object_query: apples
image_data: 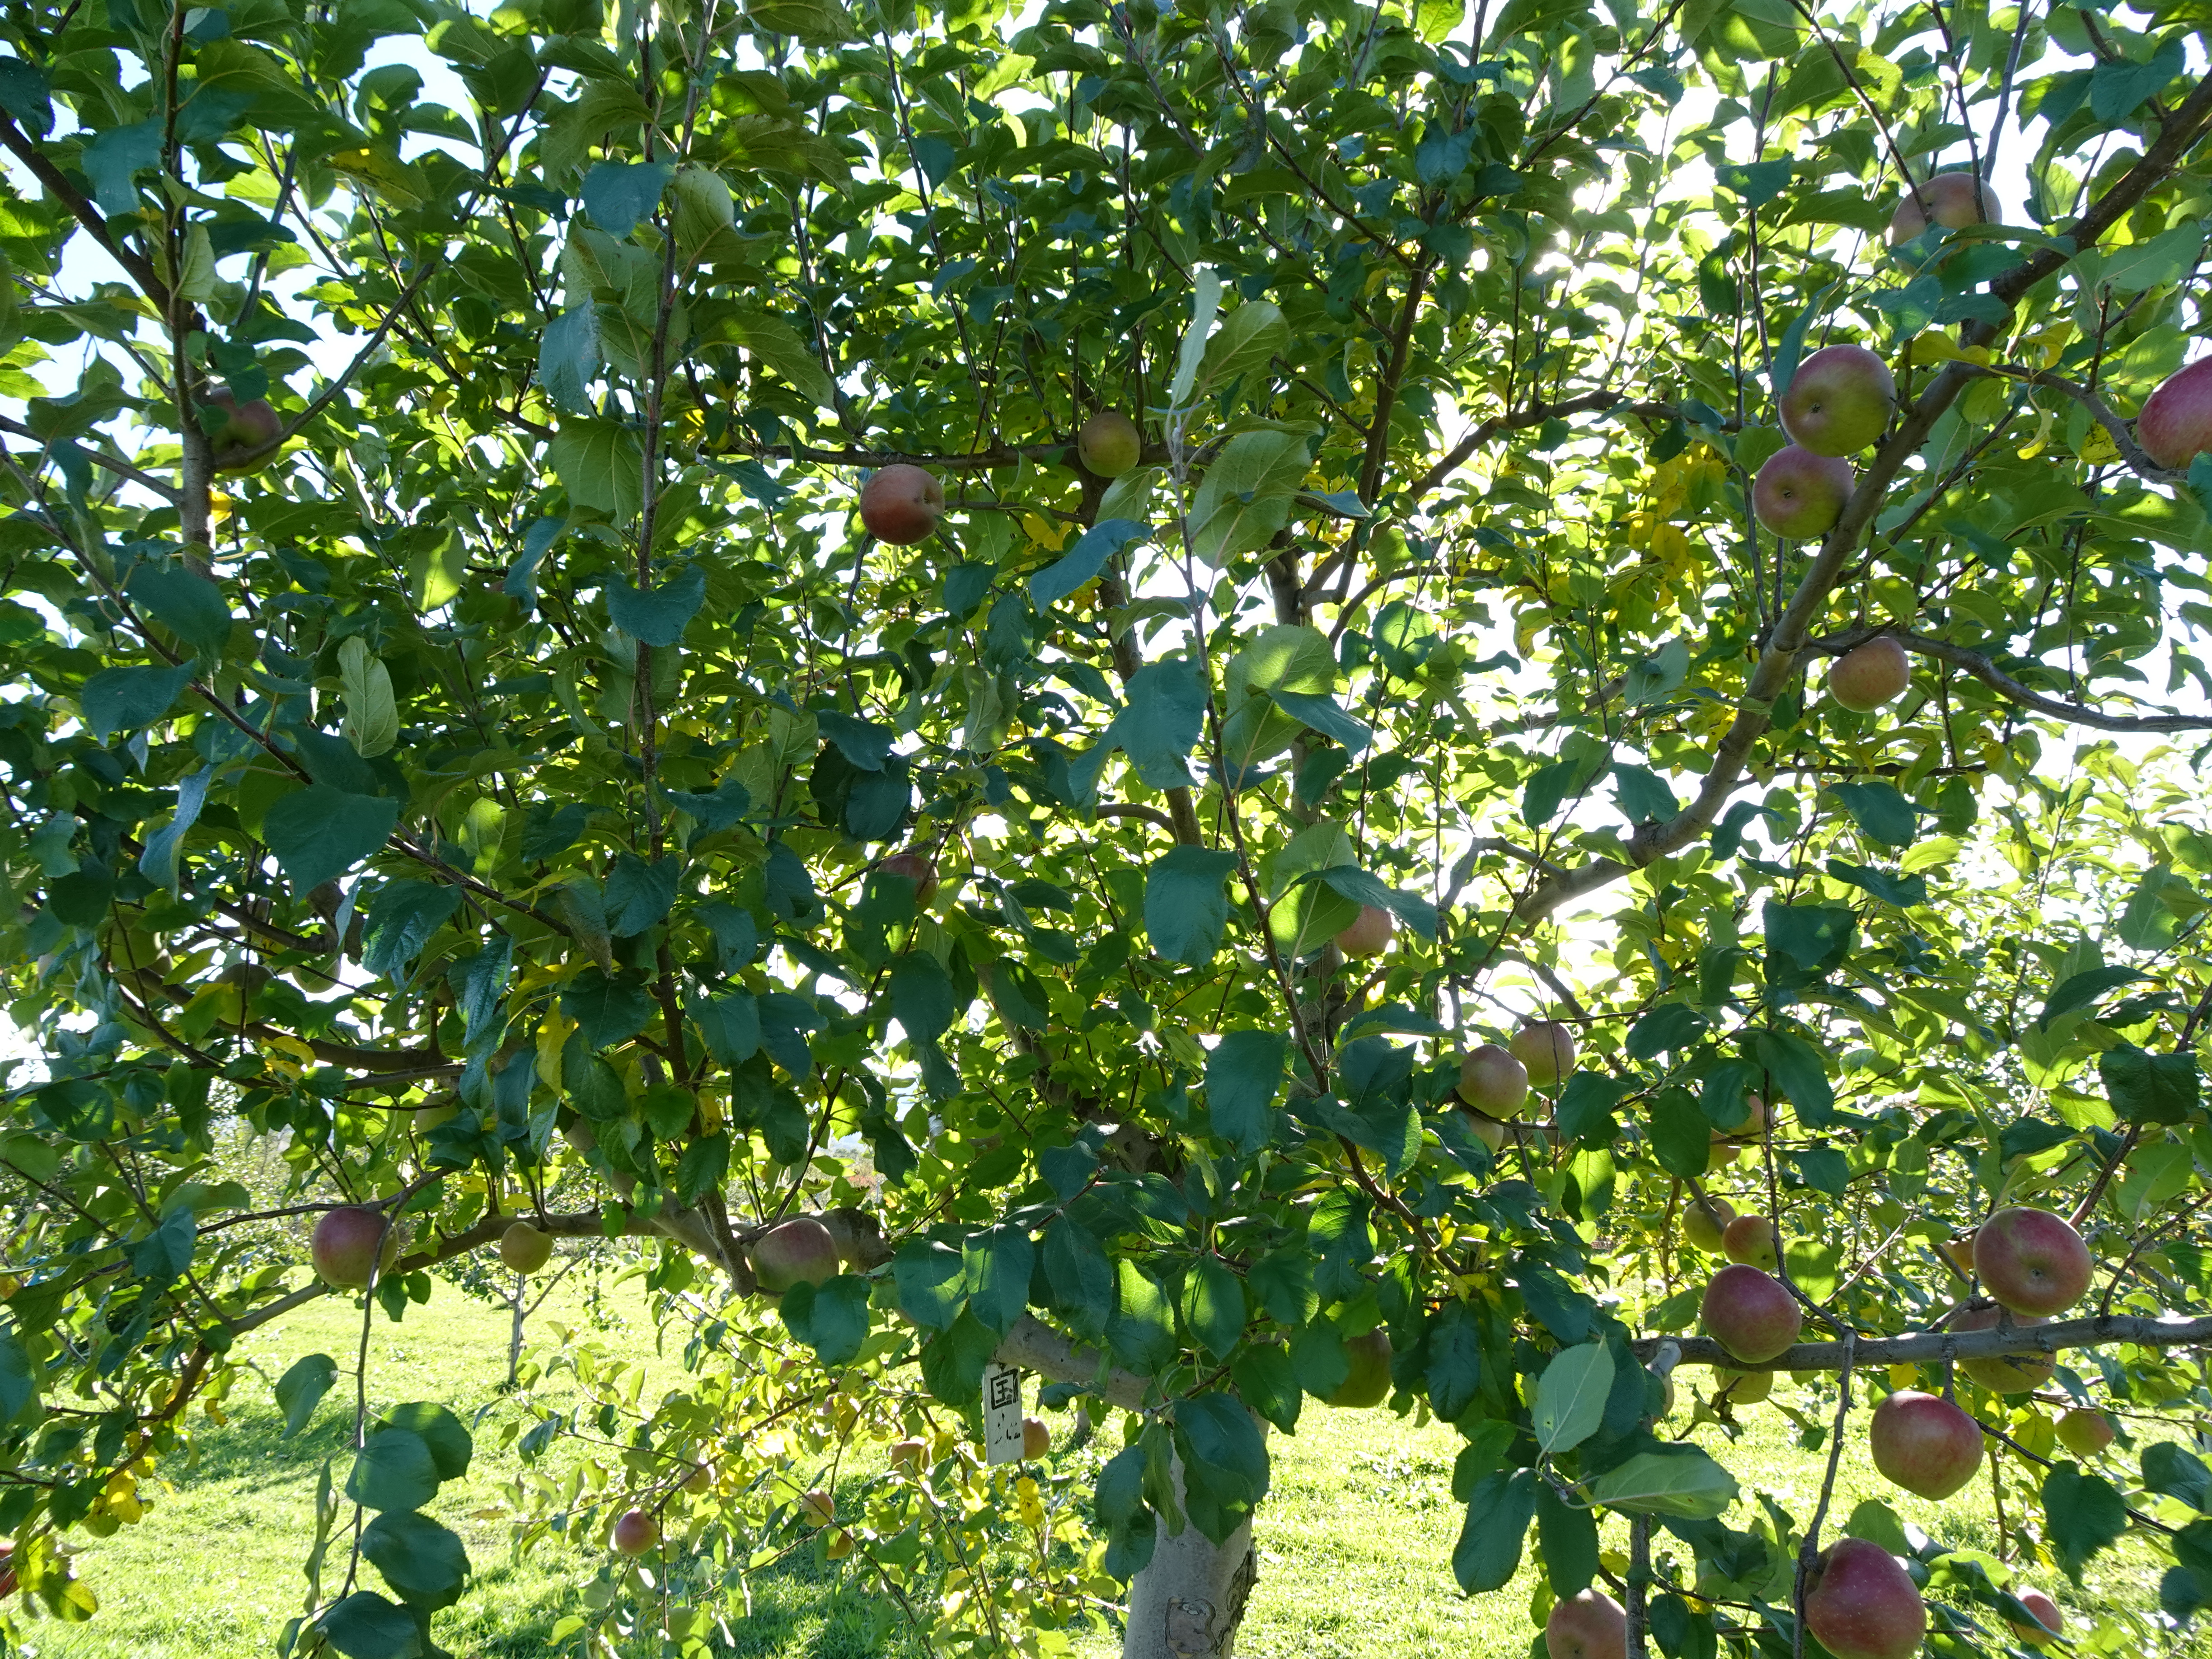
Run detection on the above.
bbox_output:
[822,1392,863,1431]
[554,1095,612,1152]
[239,899,287,949]
[864,1500,884,1518]
[1493,1114,1522,1147]
[817,1376,836,1399]
[312,1202,400,1291]
[1330,894,1393,964]
[198,385,282,481]
[1682,1196,1739,1254]
[0,1548,28,1600]
[1017,833,1041,858]
[0,1268,31,1305]
[1949,1293,2058,1394]
[816,1520,856,1561]
[1941,1228,1978,1276]
[1304,1323,1399,1411]
[1777,343,1899,459]
[874,852,939,917]
[1243,4,1280,37]
[1597,328,1615,343]
[791,670,829,700]
[749,1218,840,1309]
[1127,36,1157,64]
[414,1089,476,1146]
[209,961,275,1025]
[1427,1296,1440,1313]
[1701,1264,1802,1366]
[1870,1389,1986,1504]
[1449,1110,1504,1160]
[1714,1360,1774,1405]
[1817,779,1832,792]
[1861,1251,1880,1265]
[802,1489,834,1529]
[1724,1214,1783,1277]
[1709,1086,1778,1142]
[618,1509,660,1556]
[291,943,344,994]
[501,1223,555,1274]
[1802,1537,1926,1659]
[1325,518,1345,537]
[1007,1414,1052,1462]
[1752,444,1856,540]
[1055,966,1076,982]
[888,1439,932,1479]
[859,465,946,546]
[679,1462,712,1494]
[483,577,537,634]
[775,1355,804,1386]
[2011,1585,2066,1650]
[29,1201,52,1223]
[90,1105,146,1160]
[1825,636,1913,715]
[1107,2,1135,30]
[1853,1264,1888,1297]
[2054,1404,2122,1460]
[1894,170,2004,291]
[822,1206,883,1259]
[37,946,81,993]
[1621,1370,1676,1425]
[1453,1045,1529,1120]
[866,1421,895,1441]
[1545,1583,1647,1659]
[98,911,168,972]
[1336,1141,1368,1170]
[1523,1088,1555,1126]
[116,947,177,1002]
[960,1123,1003,1163]
[2124,1270,2142,1288]
[1078,412,1142,478]
[1039,1023,1073,1054]
[1972,1207,2095,1319]
[524,1527,540,1543]
[217,104,249,133]
[2094,272,2144,319]
[430,976,462,1009]
[2138,350,2212,481]
[1163,1385,1199,1421]
[1507,1015,1574,1087]
[597,1156,639,1192]
[1698,1119,1742,1176]
[1906,1089,1938,1117]
[489,1026,528,1072]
